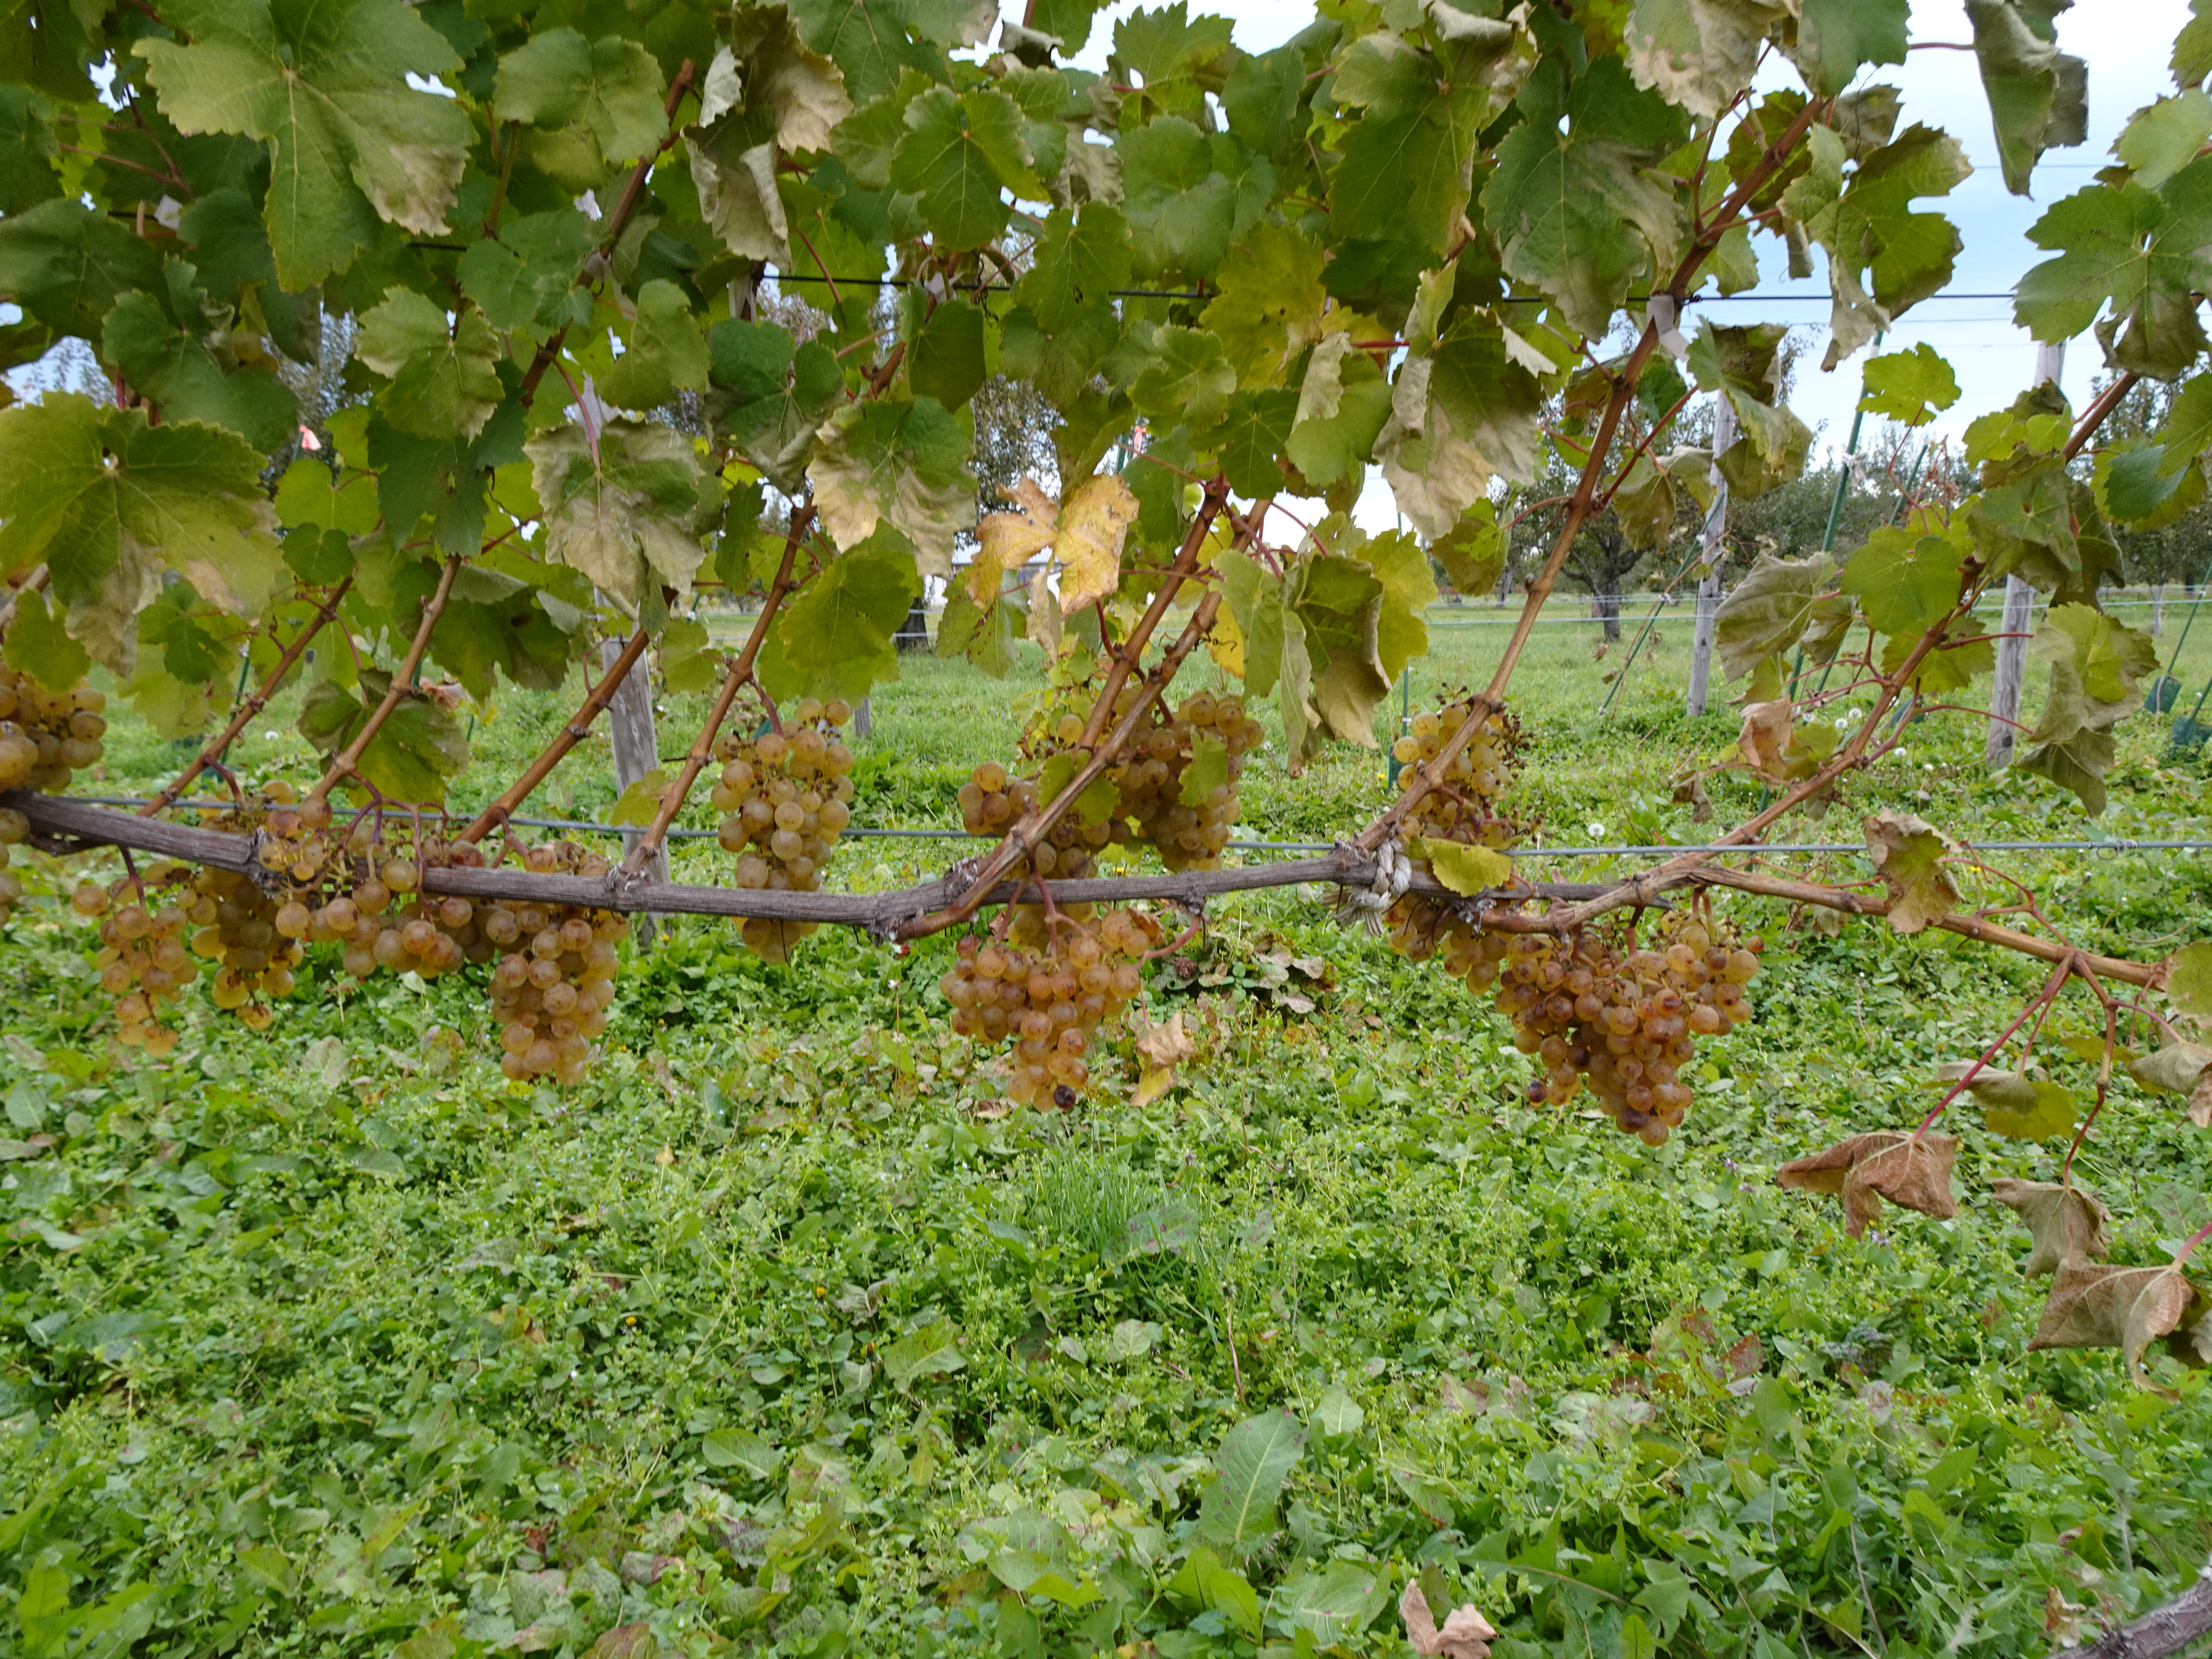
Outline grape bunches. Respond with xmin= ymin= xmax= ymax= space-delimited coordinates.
xmin=257 ymin=821 xmax=494 ymax=976
xmin=483 ymin=839 xmax=630 ymax=1084
xmin=949 ymin=755 xmax=1129 ymax=924
xmin=936 ymin=915 xmax=1167 ymax=1114
xmin=707 ymin=695 xmax=860 ymax=968
xmin=2 ymin=649 xmax=112 ymax=795
xmin=0 ymin=805 xmax=34 ymax=947
xmin=70 ymin=860 xmax=196 ymax=1059
xmin=1562 ymin=927 xmax=1700 ymax=1154
xmin=1384 ymin=856 xmax=1557 ymax=999
xmin=1129 ymin=678 xmax=1266 ymax=880
xmin=1390 ymin=695 xmax=1522 ymax=867
xmin=1050 ymin=713 xmax=1196 ymax=848
xmin=1487 ymin=934 xmax=1592 ymax=1118
xmin=182 ymin=772 xmax=340 ymax=1034
xmin=1657 ymin=902 xmax=1772 ymax=1036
